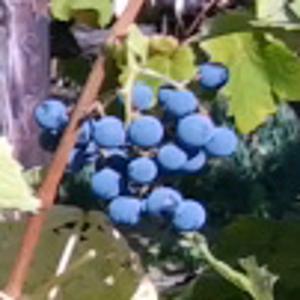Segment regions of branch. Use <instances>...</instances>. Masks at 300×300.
<instances>
[{
	"mask_svg": "<svg viewBox=\"0 0 300 300\" xmlns=\"http://www.w3.org/2000/svg\"><path fill=\"white\" fill-rule=\"evenodd\" d=\"M144 4L145 0H126L120 11V20L113 23L107 36V42L97 53L95 62L87 74L86 86L82 88L76 98L62 139L53 156V166L50 167L36 192L39 202L35 216L26 223V232L17 252L13 272L4 289V294L9 299L17 297L24 282L31 253L40 234V228L47 221L52 204L58 200L60 184L64 181L66 161L74 147L83 119L91 111L95 98L105 82L106 73L109 70L108 63L115 56L122 37L129 34Z\"/></svg>",
	"mask_w": 300,
	"mask_h": 300,
	"instance_id": "30e6481e",
	"label": "branch"
}]
</instances>
